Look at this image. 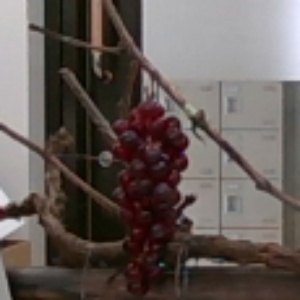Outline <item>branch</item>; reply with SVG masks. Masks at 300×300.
<instances>
[{"mask_svg":"<svg viewBox=\"0 0 300 300\" xmlns=\"http://www.w3.org/2000/svg\"><path fill=\"white\" fill-rule=\"evenodd\" d=\"M62 78L69 84L72 90L79 96L80 100H82L85 106L88 108L90 113H92V117L94 118L97 125H99L103 131L112 137L115 142H119V135L116 134L115 130L112 129L108 120L104 117V115L97 109V106L93 103L92 99L82 88L80 82L77 79V76L71 71V67H63L57 70Z\"/></svg>","mask_w":300,"mask_h":300,"instance_id":"982ccf7c","label":"branch"},{"mask_svg":"<svg viewBox=\"0 0 300 300\" xmlns=\"http://www.w3.org/2000/svg\"><path fill=\"white\" fill-rule=\"evenodd\" d=\"M106 7L109 12L110 18L113 19L114 23L118 27L119 33L122 35L118 44L113 47L103 46V45H92L88 42L79 41L74 37H69L65 35H61L55 33L47 28L40 27L36 25L34 22H29L27 24V29L31 32H41L46 33L47 35L58 38L62 41L69 42L74 45H82L86 47L92 48L94 51H103V52H117L121 50L126 45L135 53L136 58L143 65L149 74L155 75V79L159 82V84L163 87V89L173 98V100L180 106L184 107L185 104H189V100L181 95L173 88L172 85L167 82V80L161 75V72L158 70L156 66H154L145 56L142 55L140 50L137 49L134 40L127 32L122 17L117 14L115 5L113 4L112 0H106Z\"/></svg>","mask_w":300,"mask_h":300,"instance_id":"170604dd","label":"branch"},{"mask_svg":"<svg viewBox=\"0 0 300 300\" xmlns=\"http://www.w3.org/2000/svg\"><path fill=\"white\" fill-rule=\"evenodd\" d=\"M199 125L214 142H217L218 146L222 148L246 174L255 182V184L261 189L266 190L269 194L279 198L280 200L295 206L297 210H300V202L295 199L288 198L281 191H278L267 178L261 175L253 166L245 159L233 145L222 137L219 133L212 130L205 119V113L203 110H199V113L191 115V131L197 137L198 140H202L201 134L195 129Z\"/></svg>","mask_w":300,"mask_h":300,"instance_id":"45aa463d","label":"branch"},{"mask_svg":"<svg viewBox=\"0 0 300 300\" xmlns=\"http://www.w3.org/2000/svg\"><path fill=\"white\" fill-rule=\"evenodd\" d=\"M194 219L182 216L175 224L172 239L162 242V254L168 260L177 258L175 281L179 280L180 259L185 257L222 259L236 262L265 264L276 268L300 269V254L288 253L277 244H253L247 240H228L223 236H194L189 232Z\"/></svg>","mask_w":300,"mask_h":300,"instance_id":"325d2c04","label":"branch"},{"mask_svg":"<svg viewBox=\"0 0 300 300\" xmlns=\"http://www.w3.org/2000/svg\"><path fill=\"white\" fill-rule=\"evenodd\" d=\"M0 130L4 131L13 140H16L22 146L36 152L40 158L47 161V182L49 186L48 198L45 200L40 193H30L22 200V205L18 204V200H13L5 207H0V221L15 220L20 221L23 217H34L40 215L38 224L47 229L52 236L58 237L63 242L74 247L96 249V250H113L123 248L124 241L128 237H124L114 242H94L84 240L77 237L74 233L66 231L60 218L54 214L60 213L64 208V204L56 206L57 198H67V194L60 191V170L77 186L81 187L87 195L96 201L111 207L114 210H119L118 204L108 199L106 196L97 192L90 184L84 181L81 177L68 169L59 158L42 149L39 145L31 142L23 136H20L17 131L8 127L6 123L0 122Z\"/></svg>","mask_w":300,"mask_h":300,"instance_id":"30e6481e","label":"branch"}]
</instances>
